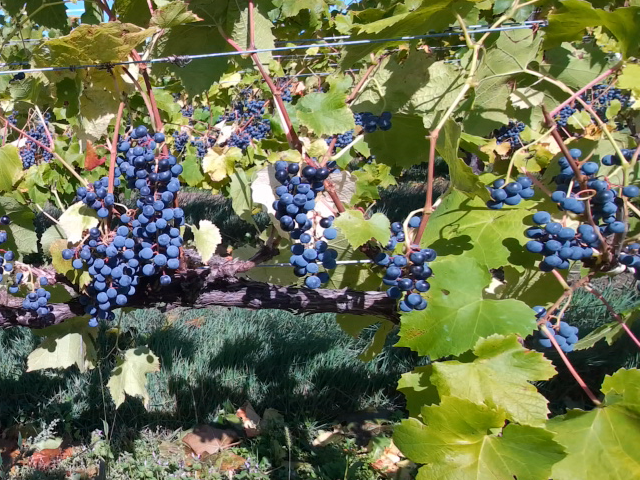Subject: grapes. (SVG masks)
Masks as SVG:
<instances>
[{"instance_id":"grapes-1","label":"grapes","mask_w":640,"mask_h":480,"mask_svg":"<svg viewBox=\"0 0 640 480\" xmlns=\"http://www.w3.org/2000/svg\"><path fill=\"white\" fill-rule=\"evenodd\" d=\"M163 141L165 135L162 132L148 134V128L144 124L134 127L125 139L119 134L117 151L125 153V157L116 158L113 185H120L122 175L128 180L127 187L137 188L141 196L135 202V206L140 209L137 219L133 220L131 215L122 213L119 221L122 224L131 223L132 235L144 239L141 244L135 243L132 237H127L130 233L127 226H120L115 231L113 241L108 245L101 244V230L98 227L88 232L89 240L82 246L79 258L72 261L71 267L80 270L84 267V260H87V272L92 276L93 283L86 287L89 297L81 294L78 303L86 307L85 312L92 317L87 320L90 328L99 325L97 317L107 321L115 318V314L109 310L111 306L127 304V296H133L135 286L139 282L137 273L140 271L141 260L152 259V263L142 266L145 276L153 275L156 266H165L167 269H177L180 266L178 257L184 238L178 228L168 223L176 219V225L182 227L186 223L185 211L181 207L173 209L166 206L182 187V181L178 176L183 172V165L177 163L175 155L169 154L166 159L158 162L159 172L155 171V164L151 162L155 157L153 151L156 143ZM148 181L167 183L157 189L159 199L156 201L153 196L155 189L148 185ZM158 230L162 233L158 235L157 243L165 249L164 253L155 254L149 238ZM90 248L105 256L108 261L91 255Z\"/></svg>"},{"instance_id":"grapes-2","label":"grapes","mask_w":640,"mask_h":480,"mask_svg":"<svg viewBox=\"0 0 640 480\" xmlns=\"http://www.w3.org/2000/svg\"><path fill=\"white\" fill-rule=\"evenodd\" d=\"M298 163L277 161L274 164V179L280 184L274 188V195L279 200L272 202L275 219L280 222V229L289 232V237L301 243H309L311 237L307 231L313 226V221L307 219V213L316 207L317 191L324 190V178L331 174L340 173L335 168L337 162L329 160L319 169L305 165L301 175L307 182H301L299 176L290 177L298 172Z\"/></svg>"},{"instance_id":"grapes-3","label":"grapes","mask_w":640,"mask_h":480,"mask_svg":"<svg viewBox=\"0 0 640 480\" xmlns=\"http://www.w3.org/2000/svg\"><path fill=\"white\" fill-rule=\"evenodd\" d=\"M532 222L542 227H529L524 231L528 240L525 249L530 253L546 256L539 264L541 272H550L555 267L567 269L570 261H580L591 257L595 249L602 247L598 237L588 224L579 225L575 231L571 226H563L560 222H552L547 211H538L532 215Z\"/></svg>"},{"instance_id":"grapes-4","label":"grapes","mask_w":640,"mask_h":480,"mask_svg":"<svg viewBox=\"0 0 640 480\" xmlns=\"http://www.w3.org/2000/svg\"><path fill=\"white\" fill-rule=\"evenodd\" d=\"M437 252L434 249H420L413 251L409 255V260L413 264L410 267L409 274L414 279L403 278L404 269L402 267L408 264V259L401 254L394 255L392 258L387 253H378L374 257L376 265L386 266V275L382 279L384 285H392L386 290V296L391 300L398 299L402 291H412L404 296L399 302V309L403 312L424 311L427 308V300L418 293H427L430 290V284L427 279L434 275V270L424 262L433 263L436 260Z\"/></svg>"},{"instance_id":"grapes-5","label":"grapes","mask_w":640,"mask_h":480,"mask_svg":"<svg viewBox=\"0 0 640 480\" xmlns=\"http://www.w3.org/2000/svg\"><path fill=\"white\" fill-rule=\"evenodd\" d=\"M289 263L292 272L297 278H303L306 287L319 288L329 281V274L326 271H319L317 261L322 262V267L333 270L336 267L338 252L335 249H328L325 240H316L311 247L294 243L290 247Z\"/></svg>"},{"instance_id":"grapes-6","label":"grapes","mask_w":640,"mask_h":480,"mask_svg":"<svg viewBox=\"0 0 640 480\" xmlns=\"http://www.w3.org/2000/svg\"><path fill=\"white\" fill-rule=\"evenodd\" d=\"M583 175L587 176V186L596 189L591 197L592 212L595 221L604 222L600 225L599 230L604 237H611L613 234H621L624 230V221L616 220L615 213L623 206V200L617 198L619 191L616 188L607 189V181L605 179H596L595 173L599 171L597 162H587L580 167Z\"/></svg>"},{"instance_id":"grapes-7","label":"grapes","mask_w":640,"mask_h":480,"mask_svg":"<svg viewBox=\"0 0 640 480\" xmlns=\"http://www.w3.org/2000/svg\"><path fill=\"white\" fill-rule=\"evenodd\" d=\"M558 165L561 173L554 178L556 189L551 194V201L557 203V208L560 211H572L575 215H581L586 211L582 198L577 194L581 189V182L578 179L573 181L574 187L570 190L569 198H567L575 171L565 156L558 159Z\"/></svg>"},{"instance_id":"grapes-8","label":"grapes","mask_w":640,"mask_h":480,"mask_svg":"<svg viewBox=\"0 0 640 480\" xmlns=\"http://www.w3.org/2000/svg\"><path fill=\"white\" fill-rule=\"evenodd\" d=\"M505 184L503 178L496 179L487 187L490 197L496 201L489 200L487 206L490 209H501L504 205L519 206L521 199H531L536 196V191L532 188L533 179L528 176H518L515 183Z\"/></svg>"},{"instance_id":"grapes-9","label":"grapes","mask_w":640,"mask_h":480,"mask_svg":"<svg viewBox=\"0 0 640 480\" xmlns=\"http://www.w3.org/2000/svg\"><path fill=\"white\" fill-rule=\"evenodd\" d=\"M93 188L96 193L89 192L85 187H79L76 195L87 207H90L93 212H97V216L100 219H104V217H108L110 206L115 202L114 195L106 191L108 188V177L103 176L101 181H95Z\"/></svg>"},{"instance_id":"grapes-10","label":"grapes","mask_w":640,"mask_h":480,"mask_svg":"<svg viewBox=\"0 0 640 480\" xmlns=\"http://www.w3.org/2000/svg\"><path fill=\"white\" fill-rule=\"evenodd\" d=\"M565 318V313H563L560 317V323L558 324V329L554 328V322L546 321V328L552 336L553 340L556 342V345L559 349L565 353L569 354L571 351L575 349V344L578 342V334L579 328L577 326H571L569 323L563 321Z\"/></svg>"},{"instance_id":"grapes-11","label":"grapes","mask_w":640,"mask_h":480,"mask_svg":"<svg viewBox=\"0 0 640 480\" xmlns=\"http://www.w3.org/2000/svg\"><path fill=\"white\" fill-rule=\"evenodd\" d=\"M51 298V293L45 288H37L35 292L25 295L22 307L25 310H34L39 316H47L51 308L47 306V300Z\"/></svg>"},{"instance_id":"grapes-12","label":"grapes","mask_w":640,"mask_h":480,"mask_svg":"<svg viewBox=\"0 0 640 480\" xmlns=\"http://www.w3.org/2000/svg\"><path fill=\"white\" fill-rule=\"evenodd\" d=\"M392 118V114L390 112H383L381 116L372 115L370 112H364L360 115V122L363 125L362 130L371 134L377 128L381 132H387L392 127V122L390 119Z\"/></svg>"},{"instance_id":"grapes-13","label":"grapes","mask_w":640,"mask_h":480,"mask_svg":"<svg viewBox=\"0 0 640 480\" xmlns=\"http://www.w3.org/2000/svg\"><path fill=\"white\" fill-rule=\"evenodd\" d=\"M390 232L396 235L390 236V241L387 243V250L393 251L397 247L399 241H403L405 239L403 223L400 221H393L390 224Z\"/></svg>"},{"instance_id":"grapes-14","label":"grapes","mask_w":640,"mask_h":480,"mask_svg":"<svg viewBox=\"0 0 640 480\" xmlns=\"http://www.w3.org/2000/svg\"><path fill=\"white\" fill-rule=\"evenodd\" d=\"M334 221L335 217L333 215L319 219V227L323 229V236L327 241H333L338 237V231L331 227Z\"/></svg>"},{"instance_id":"grapes-15","label":"grapes","mask_w":640,"mask_h":480,"mask_svg":"<svg viewBox=\"0 0 640 480\" xmlns=\"http://www.w3.org/2000/svg\"><path fill=\"white\" fill-rule=\"evenodd\" d=\"M15 259V254L11 250H6L3 255L0 254V266L4 264L5 261H13ZM4 270L6 272H11L13 270V264L11 262H6L2 267H0V282L4 280Z\"/></svg>"},{"instance_id":"grapes-16","label":"grapes","mask_w":640,"mask_h":480,"mask_svg":"<svg viewBox=\"0 0 640 480\" xmlns=\"http://www.w3.org/2000/svg\"><path fill=\"white\" fill-rule=\"evenodd\" d=\"M539 338L537 339V344L544 349H552L554 347V343L551 341V338L545 335L542 330H539Z\"/></svg>"},{"instance_id":"grapes-17","label":"grapes","mask_w":640,"mask_h":480,"mask_svg":"<svg viewBox=\"0 0 640 480\" xmlns=\"http://www.w3.org/2000/svg\"><path fill=\"white\" fill-rule=\"evenodd\" d=\"M24 277V274L22 272L17 273L14 276V281L16 283H13L9 288H8V292L12 295H16L19 291H20V286L18 284H20L22 282V278Z\"/></svg>"},{"instance_id":"grapes-18","label":"grapes","mask_w":640,"mask_h":480,"mask_svg":"<svg viewBox=\"0 0 640 480\" xmlns=\"http://www.w3.org/2000/svg\"><path fill=\"white\" fill-rule=\"evenodd\" d=\"M532 311H535V313H538V314H535L536 322H538L539 319H541L545 314H547V309L540 305L533 306Z\"/></svg>"},{"instance_id":"grapes-19","label":"grapes","mask_w":640,"mask_h":480,"mask_svg":"<svg viewBox=\"0 0 640 480\" xmlns=\"http://www.w3.org/2000/svg\"><path fill=\"white\" fill-rule=\"evenodd\" d=\"M621 152L624 154L626 161L629 162L632 159L633 155L637 153V149L635 147H632L630 149L622 148Z\"/></svg>"}]
</instances>
